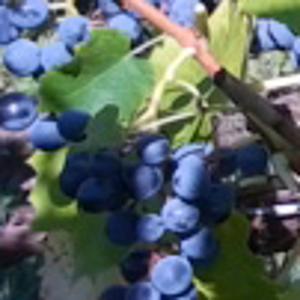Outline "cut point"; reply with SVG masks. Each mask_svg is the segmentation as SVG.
<instances>
[{
  "mask_svg": "<svg viewBox=\"0 0 300 300\" xmlns=\"http://www.w3.org/2000/svg\"><path fill=\"white\" fill-rule=\"evenodd\" d=\"M193 55L191 50H183L180 52L173 60V64L164 75L162 80L157 84L154 93L150 96L149 104L147 107V113L149 115H154L160 110V102L164 95L165 90L176 78L177 74L183 67V62L188 60Z\"/></svg>",
  "mask_w": 300,
  "mask_h": 300,
  "instance_id": "obj_1",
  "label": "cut point"
}]
</instances>
